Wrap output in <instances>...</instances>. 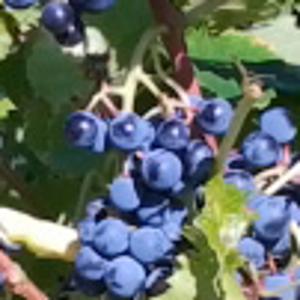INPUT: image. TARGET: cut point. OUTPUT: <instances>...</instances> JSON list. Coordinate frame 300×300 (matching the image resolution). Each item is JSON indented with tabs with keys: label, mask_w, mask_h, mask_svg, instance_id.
Masks as SVG:
<instances>
[{
	"label": "cut point",
	"mask_w": 300,
	"mask_h": 300,
	"mask_svg": "<svg viewBox=\"0 0 300 300\" xmlns=\"http://www.w3.org/2000/svg\"><path fill=\"white\" fill-rule=\"evenodd\" d=\"M160 32L156 27V23L150 25L145 32L139 37L137 45L133 52L127 77L123 86L121 85H108L100 88L93 94V100L100 102L105 97L110 95H122L121 105L127 110L134 108V87L136 83L142 78L144 72L143 59L146 55L149 43L154 39L155 36L159 35Z\"/></svg>",
	"instance_id": "6a23745f"
}]
</instances>
